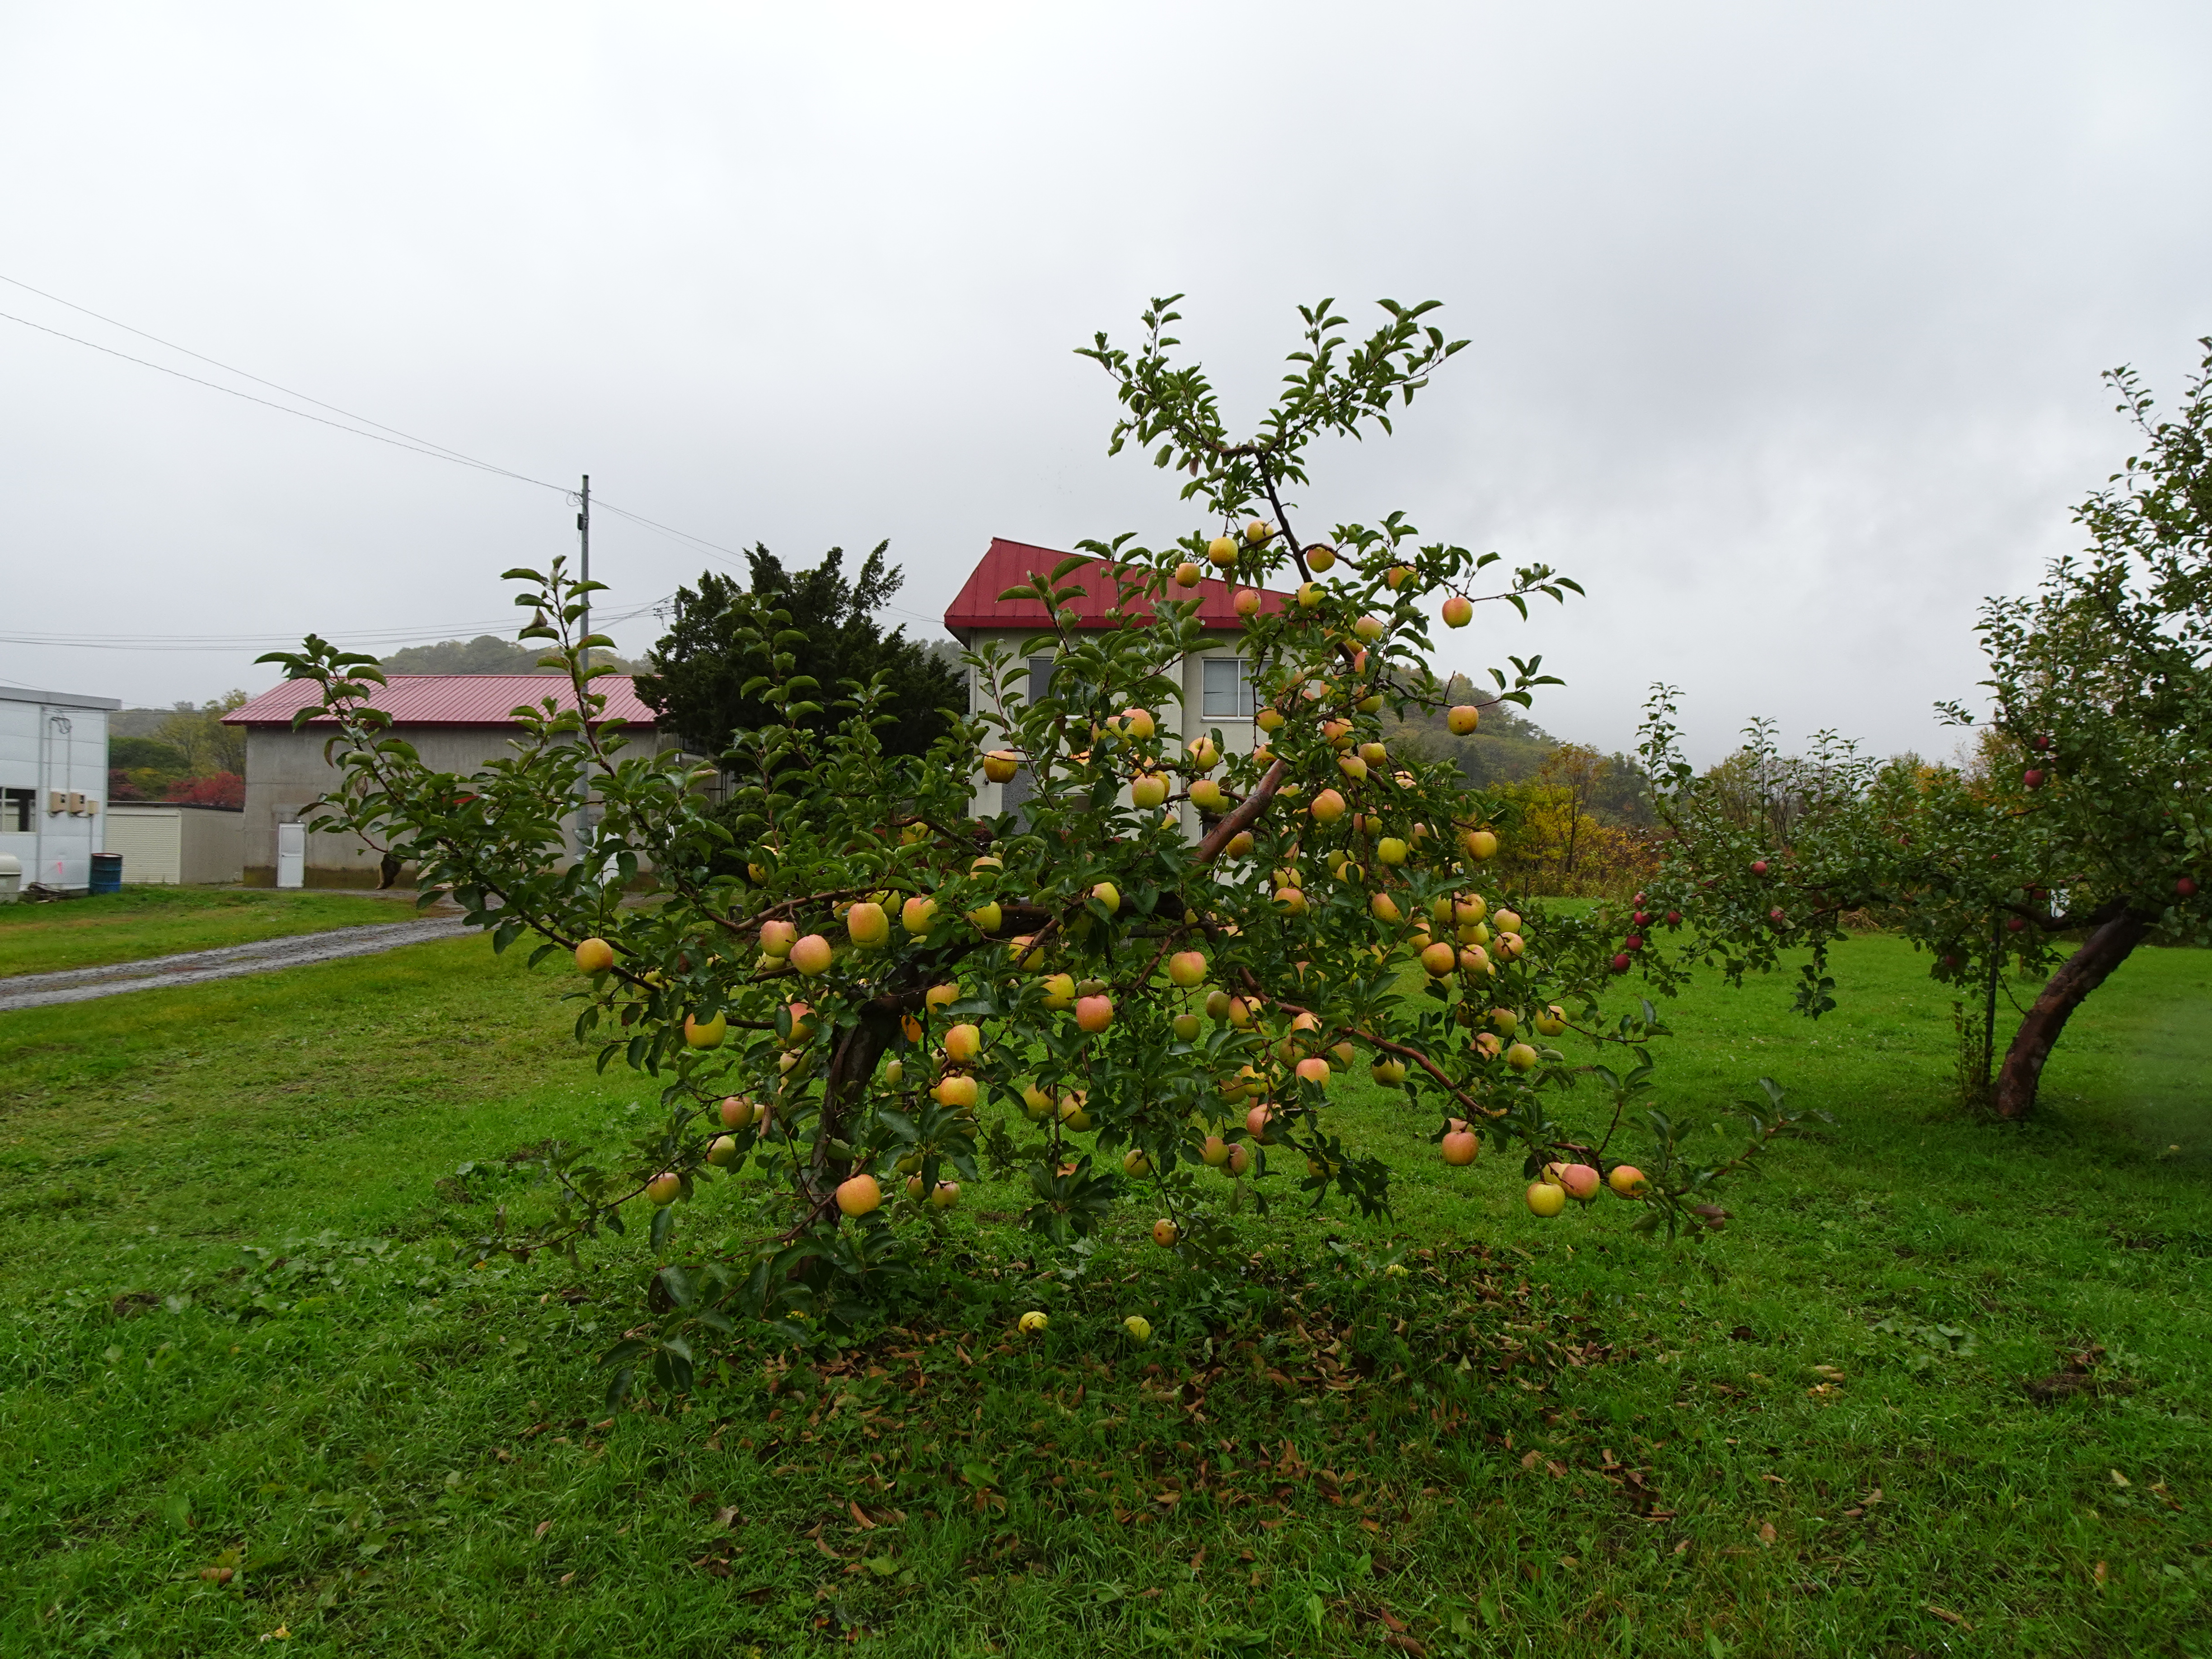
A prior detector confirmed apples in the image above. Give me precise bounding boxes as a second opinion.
[1154,812,1183,838]
[1417,938,1459,979]
[762,951,787,977]
[1079,876,1127,926]
[1251,700,1287,739]
[1239,1059,1284,1103]
[828,886,862,925]
[1287,686,1319,718]
[1034,969,1077,1014]
[905,1167,942,1203]
[899,816,935,850]
[1122,1146,1156,1185]
[788,928,837,981]
[830,1171,883,1221]
[1387,769,1415,791]
[1372,1043,1409,1093]
[1271,885,1309,921]
[816,988,840,1013]
[1057,1088,1113,1135]
[1278,671,1306,694]
[1289,956,1331,996]
[941,1020,988,1071]
[857,921,897,949]
[1088,713,1136,758]
[1251,738,1282,776]
[1168,1010,1204,1048]
[1221,1141,1254,1182]
[1265,865,1306,891]
[1606,1159,1652,1203]
[703,952,725,975]
[1246,518,1277,551]
[1485,1005,1521,1041]
[1073,973,1113,1007]
[936,1068,982,1117]
[925,1041,955,1072]
[1217,921,1247,950]
[1463,827,1502,865]
[1386,1264,1410,1286]
[1276,820,1301,842]
[1466,1031,1507,1068]
[1318,671,1355,709]
[1432,893,1465,927]
[1296,1057,1339,1095]
[1184,905,1219,940]
[1295,580,1331,618]
[1215,1070,1249,1107]
[1336,753,1370,791]
[1117,704,1161,746]
[630,962,668,999]
[1445,700,1484,740]
[1275,1039,1317,1076]
[1170,558,1204,590]
[1503,1040,1542,1078]
[1125,768,1166,813]
[777,1047,813,1084]
[681,1005,730,1054]
[1350,683,1383,717]
[925,981,966,1028]
[641,1167,685,1208]
[1355,739,1392,771]
[1436,1112,1477,1150]
[1525,1179,1567,1221]
[856,977,881,999]
[1014,1075,1060,1126]
[573,935,617,984]
[1405,818,1445,851]
[783,992,811,1014]
[1458,919,1494,956]
[1192,1132,1232,1173]
[1186,778,1221,811]
[1246,1102,1290,1150]
[1226,994,1264,1030]
[718,1093,755,1133]
[1125,752,1162,787]
[1221,827,1260,866]
[1271,838,1301,866]
[1324,843,1358,871]
[945,1115,985,1151]
[1369,887,1416,930]
[1537,1153,1575,1192]
[926,1176,962,1214]
[1308,1151,1337,1182]
[748,1098,773,1136]
[1004,930,1049,979]
[1204,988,1235,1022]
[704,1135,742,1170]
[1385,562,1421,597]
[1456,992,1489,1030]
[1438,592,1474,633]
[982,747,1023,788]
[1534,1001,1574,1040]
[1405,918,1440,955]
[1358,940,1396,976]
[1336,861,1369,894]
[1051,1157,1098,1195]
[900,894,942,938]
[1151,1215,1187,1252]
[1206,783,1236,821]
[883,1052,919,1098]
[1352,798,1385,840]
[1440,1130,1481,1168]
[1454,941,1492,977]
[758,915,802,961]
[1491,931,1532,965]
[1304,543,1339,576]
[962,894,1007,941]
[1558,1163,1602,1203]
[1231,587,1263,620]
[1352,612,1387,649]
[847,900,887,945]
[1308,785,1348,830]
[1166,945,1212,990]
[772,1001,821,1046]
[1435,855,1462,879]
[1492,903,1524,937]
[1069,751,1100,783]
[1206,534,1243,571]
[1182,732,1225,776]
[1375,833,1408,872]
[1389,778,1425,806]
[744,841,787,888]
[1357,1005,1397,1046]
[966,854,1011,897]
[1320,716,1358,754]
[1322,1033,1357,1075]
[1316,627,1344,661]
[1453,891,1491,931]
[1073,990,1116,1037]
[1055,906,1093,941]
[1350,645,1389,680]
[1287,1008,1331,1050]
[1273,781,1306,812]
